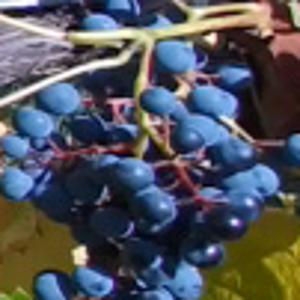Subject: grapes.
Instances as JSON below:
<instances>
[{
    "label": "grapes",
    "instance_id": "01657485",
    "mask_svg": "<svg viewBox=\"0 0 300 300\" xmlns=\"http://www.w3.org/2000/svg\"><path fill=\"white\" fill-rule=\"evenodd\" d=\"M156 69L170 88L150 85L115 99L103 115L82 112L66 82L16 109L0 153V193L30 201L58 229L87 246L91 265L44 270L36 300H198L202 268L240 241L282 186L280 173L237 119L253 70L220 63L183 39L158 41Z\"/></svg>",
    "mask_w": 300,
    "mask_h": 300
},
{
    "label": "grapes",
    "instance_id": "b958b902",
    "mask_svg": "<svg viewBox=\"0 0 300 300\" xmlns=\"http://www.w3.org/2000/svg\"><path fill=\"white\" fill-rule=\"evenodd\" d=\"M141 6L136 0H107L102 7V14L86 17L80 29L99 30L101 28L120 27L126 22L137 19Z\"/></svg>",
    "mask_w": 300,
    "mask_h": 300
}]
</instances>
